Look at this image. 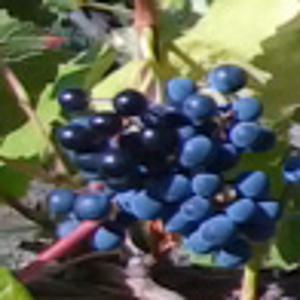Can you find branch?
I'll use <instances>...</instances> for the list:
<instances>
[{
  "label": "branch",
  "instance_id": "obj_1",
  "mask_svg": "<svg viewBox=\"0 0 300 300\" xmlns=\"http://www.w3.org/2000/svg\"><path fill=\"white\" fill-rule=\"evenodd\" d=\"M134 11V25H135V52L137 61L142 63L145 56L140 49L141 30L151 25L154 31V50L155 58L159 65L163 64V58L160 54V34L162 16L159 12L158 0H132Z\"/></svg>",
  "mask_w": 300,
  "mask_h": 300
},
{
  "label": "branch",
  "instance_id": "obj_2",
  "mask_svg": "<svg viewBox=\"0 0 300 300\" xmlns=\"http://www.w3.org/2000/svg\"><path fill=\"white\" fill-rule=\"evenodd\" d=\"M152 69V65L151 64H148L147 67L141 71L140 73V81L141 82H144L145 79H146V76L149 74V72L151 71Z\"/></svg>",
  "mask_w": 300,
  "mask_h": 300
}]
</instances>
